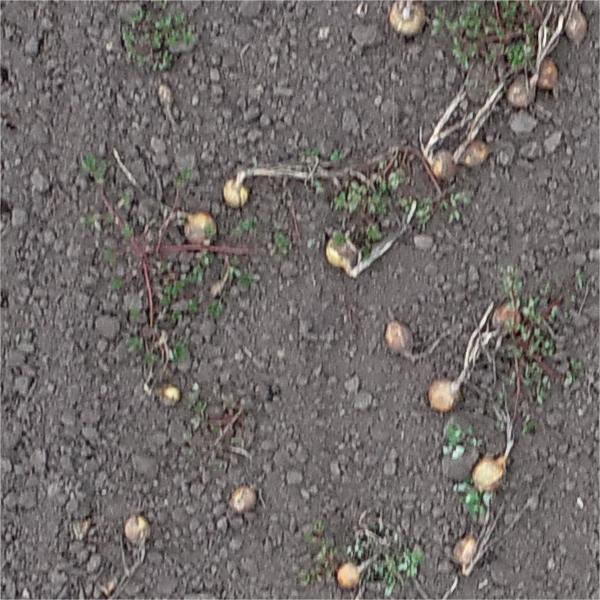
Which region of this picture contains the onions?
[334,559,360,585]
[383,319,414,353]
[123,512,150,541]
[492,300,517,327]
[470,453,505,487]
[323,233,358,271]
[460,137,489,167]
[227,483,256,513]
[428,148,455,179]
[425,377,459,411]
[562,13,586,39]
[221,173,250,207]
[504,76,532,104]
[181,208,214,244]
[450,535,479,567]
[388,1,425,35]
[157,381,180,403]
[536,59,558,88]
